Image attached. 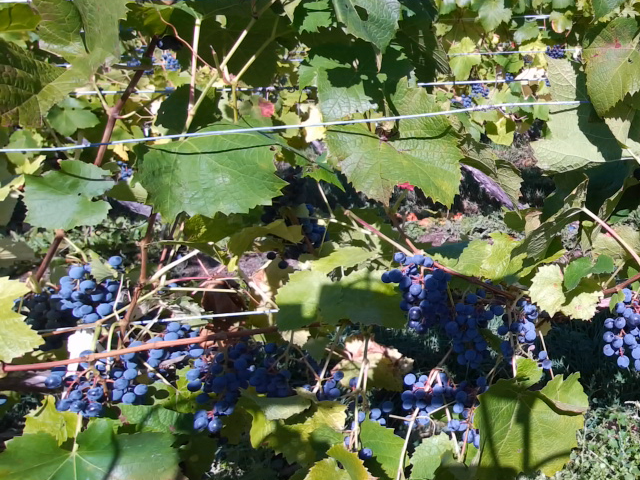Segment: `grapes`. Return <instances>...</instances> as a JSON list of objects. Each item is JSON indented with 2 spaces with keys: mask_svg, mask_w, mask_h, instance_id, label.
<instances>
[{
  "mask_svg": "<svg viewBox=\"0 0 640 480\" xmlns=\"http://www.w3.org/2000/svg\"><path fill=\"white\" fill-rule=\"evenodd\" d=\"M439 383L433 386V389L425 390L423 386L428 381L426 374H421L418 378L413 373H408L404 377V385L406 387L414 386V389H405L402 395V410L410 411L414 407L420 409L415 417V422L422 428L430 426L431 416L429 413L433 409L443 406V394H447L450 398H455L452 405L454 413H461L463 417L470 415V410L465 405H472L474 398L467 396L465 389L469 387L467 380H462L457 388L454 385H447L448 377L445 373L438 375Z\"/></svg>",
  "mask_w": 640,
  "mask_h": 480,
  "instance_id": "4",
  "label": "grapes"
},
{
  "mask_svg": "<svg viewBox=\"0 0 640 480\" xmlns=\"http://www.w3.org/2000/svg\"><path fill=\"white\" fill-rule=\"evenodd\" d=\"M184 355H187L189 359H196L194 369L185 373V378L189 381L187 384L189 391H199L202 388L199 377L203 374L211 375L203 386L205 393L196 396L198 405H206L211 400L209 393L212 391L216 394L225 393L222 400L211 403L214 415L208 416L205 409H199L195 412L192 418V429L199 433H205L209 429L212 434H218L222 429V421L216 415L231 417L235 405L238 403L239 391L237 389H247L249 383L254 386L256 393L266 391L268 398L290 400L294 397V390L285 384V381L291 378L289 370H279L275 375H272L267 373L265 367L256 368L254 371L247 368L252 363V358L258 355V350L248 348L245 342H237L230 350L229 359L233 365L231 373H226L224 377L219 375L222 371L224 355L217 353L214 364L210 365L199 359L204 355V348L196 344L150 350L148 351L147 364L150 367H157L166 359H174Z\"/></svg>",
  "mask_w": 640,
  "mask_h": 480,
  "instance_id": "2",
  "label": "grapes"
},
{
  "mask_svg": "<svg viewBox=\"0 0 640 480\" xmlns=\"http://www.w3.org/2000/svg\"><path fill=\"white\" fill-rule=\"evenodd\" d=\"M66 374L64 367L52 369L50 376L45 379V387L48 391H54L56 387H59L62 382V377Z\"/></svg>",
  "mask_w": 640,
  "mask_h": 480,
  "instance_id": "14",
  "label": "grapes"
},
{
  "mask_svg": "<svg viewBox=\"0 0 640 480\" xmlns=\"http://www.w3.org/2000/svg\"><path fill=\"white\" fill-rule=\"evenodd\" d=\"M89 263L70 264L65 275L58 279L59 291L49 288L51 294H34L24 300L31 313L27 321L35 328L71 327L76 322L92 325L101 317L113 313V304L118 294V282L105 279L96 286L89 278Z\"/></svg>",
  "mask_w": 640,
  "mask_h": 480,
  "instance_id": "3",
  "label": "grapes"
},
{
  "mask_svg": "<svg viewBox=\"0 0 640 480\" xmlns=\"http://www.w3.org/2000/svg\"><path fill=\"white\" fill-rule=\"evenodd\" d=\"M342 378L343 373L341 371H335L332 378L327 380L323 389H320L317 392V398L323 402H331L334 399H337L340 396V389L335 386Z\"/></svg>",
  "mask_w": 640,
  "mask_h": 480,
  "instance_id": "11",
  "label": "grapes"
},
{
  "mask_svg": "<svg viewBox=\"0 0 640 480\" xmlns=\"http://www.w3.org/2000/svg\"><path fill=\"white\" fill-rule=\"evenodd\" d=\"M200 335H202V331L200 329H194L192 331V328L187 324H170V327L168 329H165V332L162 334V336L151 337L148 340V343L169 341L178 338L194 337Z\"/></svg>",
  "mask_w": 640,
  "mask_h": 480,
  "instance_id": "9",
  "label": "grapes"
},
{
  "mask_svg": "<svg viewBox=\"0 0 640 480\" xmlns=\"http://www.w3.org/2000/svg\"><path fill=\"white\" fill-rule=\"evenodd\" d=\"M97 374L101 378L111 379L107 382L108 399L131 405L140 396H148L149 386L145 383L130 385L129 381L139 377L138 363L135 354L118 357H108L96 364Z\"/></svg>",
  "mask_w": 640,
  "mask_h": 480,
  "instance_id": "5",
  "label": "grapes"
},
{
  "mask_svg": "<svg viewBox=\"0 0 640 480\" xmlns=\"http://www.w3.org/2000/svg\"><path fill=\"white\" fill-rule=\"evenodd\" d=\"M72 331H66L63 333H56L52 336H48L44 338V346L40 347L41 351L51 350V349H60L64 345V340H67L69 336H72Z\"/></svg>",
  "mask_w": 640,
  "mask_h": 480,
  "instance_id": "13",
  "label": "grapes"
},
{
  "mask_svg": "<svg viewBox=\"0 0 640 480\" xmlns=\"http://www.w3.org/2000/svg\"><path fill=\"white\" fill-rule=\"evenodd\" d=\"M393 260L399 262V266L404 269H390L382 275L384 283L399 282V289L404 291L403 299L399 303V308L409 312L410 326L418 334H424L434 320L439 317L445 324V334L451 339V345L457 354L456 363L467 365L470 369H478L484 359V349L487 340L479 335V328H484L487 322L494 319V315L501 316L503 307L492 305L490 310H476L473 304L458 302L456 311L460 313L452 320L449 312V294L446 291L448 282L451 279L449 272H444L441 268H434L432 273L424 277V287L420 281H412V277L419 275L417 265L423 268H431L433 259L423 255H413L405 257L403 251H397L393 255ZM472 341L473 348H465L463 343Z\"/></svg>",
  "mask_w": 640,
  "mask_h": 480,
  "instance_id": "1",
  "label": "grapes"
},
{
  "mask_svg": "<svg viewBox=\"0 0 640 480\" xmlns=\"http://www.w3.org/2000/svg\"><path fill=\"white\" fill-rule=\"evenodd\" d=\"M117 165L122 169L120 172V178L122 181H126L132 175V169L128 167L127 163L123 161H118Z\"/></svg>",
  "mask_w": 640,
  "mask_h": 480,
  "instance_id": "17",
  "label": "grapes"
},
{
  "mask_svg": "<svg viewBox=\"0 0 640 480\" xmlns=\"http://www.w3.org/2000/svg\"><path fill=\"white\" fill-rule=\"evenodd\" d=\"M104 393L102 386L94 387L91 379L79 381L73 388L67 390L68 398L60 399L56 403L58 411L72 410L76 414L86 418H95L103 409V404L98 400Z\"/></svg>",
  "mask_w": 640,
  "mask_h": 480,
  "instance_id": "7",
  "label": "grapes"
},
{
  "mask_svg": "<svg viewBox=\"0 0 640 480\" xmlns=\"http://www.w3.org/2000/svg\"><path fill=\"white\" fill-rule=\"evenodd\" d=\"M381 410L384 413H390L393 410V403L391 401H383L381 403ZM381 410L379 408H374L369 413V418L371 420H378V425L380 427H386L388 425V420L386 418H380Z\"/></svg>",
  "mask_w": 640,
  "mask_h": 480,
  "instance_id": "15",
  "label": "grapes"
},
{
  "mask_svg": "<svg viewBox=\"0 0 640 480\" xmlns=\"http://www.w3.org/2000/svg\"><path fill=\"white\" fill-rule=\"evenodd\" d=\"M468 428L469 423L462 421L460 418H454L448 422V429L450 431H463L462 440L465 443H472L474 446H479L481 444L480 435L473 429Z\"/></svg>",
  "mask_w": 640,
  "mask_h": 480,
  "instance_id": "10",
  "label": "grapes"
},
{
  "mask_svg": "<svg viewBox=\"0 0 640 480\" xmlns=\"http://www.w3.org/2000/svg\"><path fill=\"white\" fill-rule=\"evenodd\" d=\"M471 89H472V93L471 95H465V94H461L460 95V100L458 98H451L450 99V103L454 104V103H460L462 104L463 107H471L473 105L472 99L477 98L478 97V93L483 97V98H487L488 95L490 94V89L489 88H484L481 85H471Z\"/></svg>",
  "mask_w": 640,
  "mask_h": 480,
  "instance_id": "12",
  "label": "grapes"
},
{
  "mask_svg": "<svg viewBox=\"0 0 640 480\" xmlns=\"http://www.w3.org/2000/svg\"><path fill=\"white\" fill-rule=\"evenodd\" d=\"M162 60L164 63H167L165 65L166 70L177 71L181 69V63L179 62V59L178 58L174 59L172 54H169V53L163 54Z\"/></svg>",
  "mask_w": 640,
  "mask_h": 480,
  "instance_id": "16",
  "label": "grapes"
},
{
  "mask_svg": "<svg viewBox=\"0 0 640 480\" xmlns=\"http://www.w3.org/2000/svg\"><path fill=\"white\" fill-rule=\"evenodd\" d=\"M517 307L526 313V318H520L518 321H514L511 325L512 316L505 314L503 316L502 324L498 327V333L500 335H506L508 328L512 333H522L518 337L520 344L534 343L536 341L535 326L532 323L539 317V309L534 305L532 301L519 300Z\"/></svg>",
  "mask_w": 640,
  "mask_h": 480,
  "instance_id": "8",
  "label": "grapes"
},
{
  "mask_svg": "<svg viewBox=\"0 0 640 480\" xmlns=\"http://www.w3.org/2000/svg\"><path fill=\"white\" fill-rule=\"evenodd\" d=\"M614 311L621 316L606 318L604 320V327L606 329H623L627 326L630 333L621 336L612 331H605L603 333V341L605 344L602 346V352L607 357H612L613 355H617L619 348L626 344V346L632 350L631 360L634 362V368L640 370V343L637 342V339L640 338V315L632 306L626 307L622 302L615 304Z\"/></svg>",
  "mask_w": 640,
  "mask_h": 480,
  "instance_id": "6",
  "label": "grapes"
}]
</instances>
